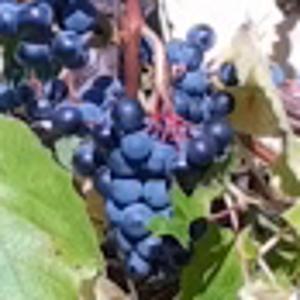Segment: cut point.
Returning a JSON list of instances; mask_svg holds the SVG:
<instances>
[{"label": "cut point", "mask_w": 300, "mask_h": 300, "mask_svg": "<svg viewBox=\"0 0 300 300\" xmlns=\"http://www.w3.org/2000/svg\"><path fill=\"white\" fill-rule=\"evenodd\" d=\"M138 31L153 45L156 58V62L154 63V80L156 82H161L162 80L170 81L172 79V73L167 68V59L163 50L162 40L153 30L148 28L145 22L138 24Z\"/></svg>", "instance_id": "6a23745f"}]
</instances>
